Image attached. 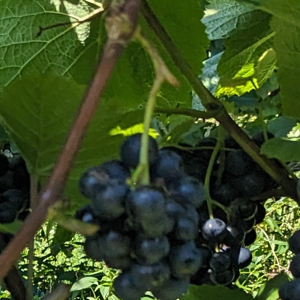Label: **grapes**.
<instances>
[{"label": "grapes", "instance_id": "obj_1", "mask_svg": "<svg viewBox=\"0 0 300 300\" xmlns=\"http://www.w3.org/2000/svg\"><path fill=\"white\" fill-rule=\"evenodd\" d=\"M119 155L80 175L79 191L91 204L74 216L86 254L121 269L115 294L139 300L151 290L173 300L191 283H233L252 261L244 246L255 241L252 226L265 209L250 196L264 190L267 171L234 149L214 162L205 190L208 158L201 151H158L151 135L137 133L121 143Z\"/></svg>", "mask_w": 300, "mask_h": 300}]
</instances>
